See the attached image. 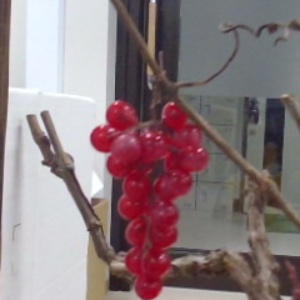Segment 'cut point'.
Masks as SVG:
<instances>
[{"label":"cut point","mask_w":300,"mask_h":300,"mask_svg":"<svg viewBox=\"0 0 300 300\" xmlns=\"http://www.w3.org/2000/svg\"><path fill=\"white\" fill-rule=\"evenodd\" d=\"M158 85H160L158 83V81H154L153 83V94H152V100L150 103V111L153 115V119H148L144 122H142L139 125H144V126H148L152 124V128H158V124L157 123H161V120H157L156 118V112H155V106H156V97H157V92H158Z\"/></svg>","instance_id":"obj_1"}]
</instances>
